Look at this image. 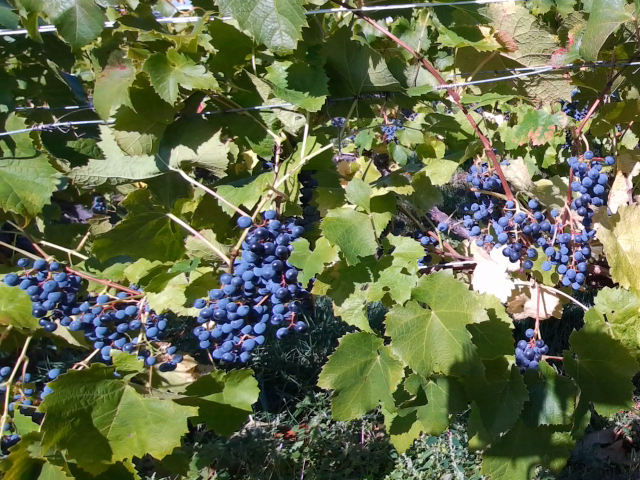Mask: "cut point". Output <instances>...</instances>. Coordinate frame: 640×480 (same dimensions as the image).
I'll use <instances>...</instances> for the list:
<instances>
[{
    "instance_id": "obj_1",
    "label": "cut point",
    "mask_w": 640,
    "mask_h": 480,
    "mask_svg": "<svg viewBox=\"0 0 640 480\" xmlns=\"http://www.w3.org/2000/svg\"><path fill=\"white\" fill-rule=\"evenodd\" d=\"M567 201H568V199H567V200H565L563 208L559 211V215H562V214H563V212H564V210H565V209H568L569 217H570V221H573L572 209H571V207H570V206H568V205H567Z\"/></svg>"
},
{
    "instance_id": "obj_2",
    "label": "cut point",
    "mask_w": 640,
    "mask_h": 480,
    "mask_svg": "<svg viewBox=\"0 0 640 480\" xmlns=\"http://www.w3.org/2000/svg\"><path fill=\"white\" fill-rule=\"evenodd\" d=\"M487 150L485 148L482 149L480 158L477 160V164H480L481 161L485 160L488 163V166H490V161L486 155Z\"/></svg>"
},
{
    "instance_id": "obj_3",
    "label": "cut point",
    "mask_w": 640,
    "mask_h": 480,
    "mask_svg": "<svg viewBox=\"0 0 640 480\" xmlns=\"http://www.w3.org/2000/svg\"><path fill=\"white\" fill-rule=\"evenodd\" d=\"M579 136H580V137H581V139H582V142H583L584 147H585L586 149H589V148H590V144H589V142H588V139H587V137H586L585 133H584L583 131H581V132L579 133Z\"/></svg>"
}]
</instances>
